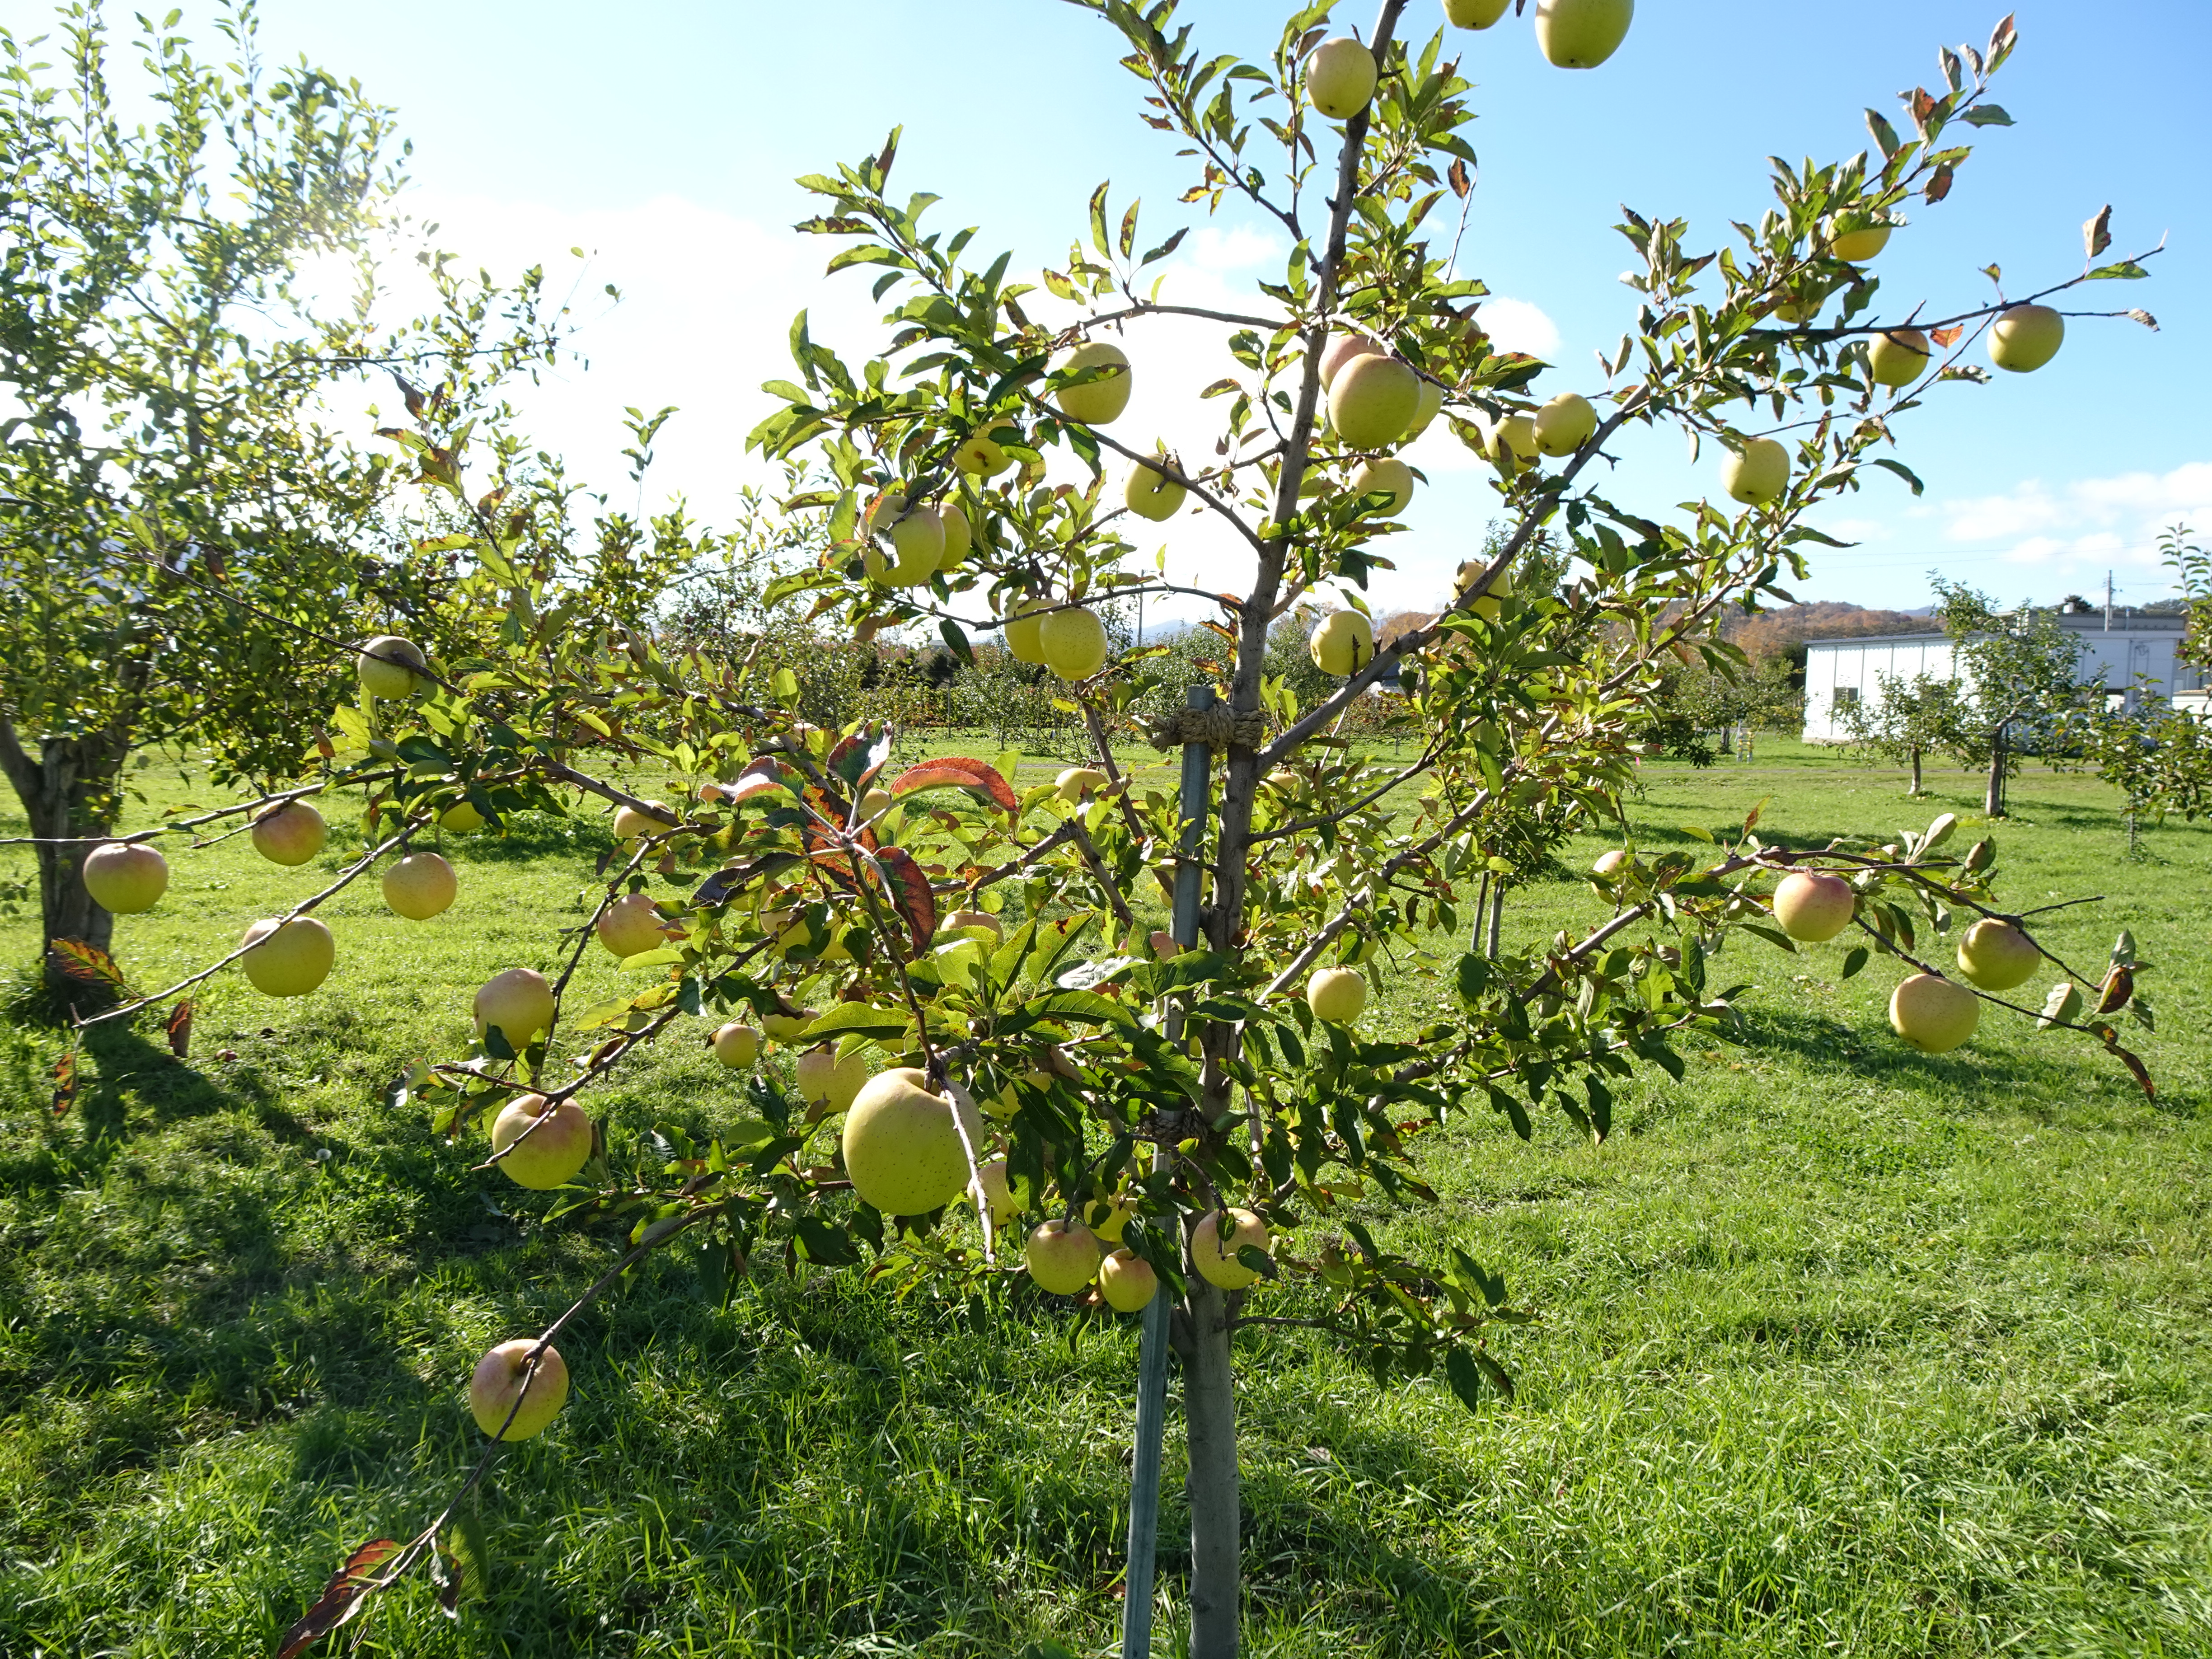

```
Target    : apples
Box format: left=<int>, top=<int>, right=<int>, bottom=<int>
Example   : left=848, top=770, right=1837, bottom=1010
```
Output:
left=1484, top=836, right=1503, bottom=857
left=837, top=972, right=877, bottom=1007
left=1773, top=872, right=1853, bottom=943
left=1117, top=929, right=1178, bottom=993
left=967, top=1151, right=1030, bottom=1227
left=431, top=785, right=487, bottom=833
left=712, top=1023, right=768, bottom=1072
left=1947, top=882, right=1977, bottom=906
left=1003, top=597, right=1066, bottom=663
left=617, top=643, right=643, bottom=667
left=1240, top=927, right=1259, bottom=944
left=1545, top=659, right=1564, bottom=678
left=1310, top=608, right=1375, bottom=676
left=1265, top=770, right=1307, bottom=810
left=1345, top=851, right=1370, bottom=873
left=944, top=407, right=1019, bottom=477
left=842, top=1066, right=984, bottom=1217
left=1441, top=0, right=1516, bottom=32
left=1055, top=342, right=1134, bottom=426
left=696, top=781, right=743, bottom=821
left=1040, top=602, right=1109, bottom=680
left=936, top=909, right=1007, bottom=971
left=1309, top=965, right=1367, bottom=1027
left=912, top=500, right=974, bottom=573
left=1157, top=855, right=1209, bottom=910
left=729, top=772, right=794, bottom=823
left=528, top=555, right=556, bottom=581
left=850, top=787, right=908, bottom=845
left=760, top=894, right=809, bottom=939
left=1024, top=1218, right=1102, bottom=1297
left=303, top=762, right=327, bottom=783
left=796, top=1007, right=823, bottom=1033
left=1533, top=390, right=1599, bottom=458
left=1533, top=0, right=1635, bottom=70
left=1863, top=324, right=1931, bottom=388
left=357, top=636, right=427, bottom=701
left=1456, top=559, right=1513, bottom=622
left=1085, top=1195, right=1149, bottom=1243
left=1351, top=457, right=1415, bottom=518
left=1704, top=1047, right=1725, bottom=1065
left=1101, top=1248, right=1156, bottom=1311
left=471, top=1337, right=570, bottom=1441
left=717, top=854, right=778, bottom=913
left=492, top=1091, right=593, bottom=1192
left=1295, top=840, right=1312, bottom=858
left=1809, top=868, right=1867, bottom=924
left=1050, top=767, right=1114, bottom=826
left=598, top=892, right=670, bottom=960
left=1729, top=1062, right=1746, bottom=1075
left=1327, top=353, right=1422, bottom=448
left=84, top=841, right=170, bottom=916
left=856, top=492, right=946, bottom=588
left=1956, top=915, right=2042, bottom=992
left=1331, top=932, right=1363, bottom=962
left=975, top=1054, right=1051, bottom=1122
left=1822, top=193, right=1893, bottom=260
left=1718, top=436, right=1792, bottom=505
left=763, top=916, right=821, bottom=964
left=491, top=702, right=510, bottom=718
left=251, top=799, right=326, bottom=866
left=1592, top=849, right=1649, bottom=902
left=1121, top=450, right=1190, bottom=522
left=474, top=967, right=555, bottom=1041
left=1305, top=36, right=1379, bottom=122
left=1766, top=259, right=1829, bottom=324
left=1174, top=1029, right=1205, bottom=1059
left=1191, top=1207, right=1269, bottom=1290
left=797, top=1041, right=867, bottom=1112
left=873, top=1010, right=921, bottom=1051
left=786, top=720, right=822, bottom=759
left=714, top=688, right=742, bottom=712
left=1124, top=1051, right=1163, bottom=1088
left=239, top=916, right=336, bottom=999
left=707, top=741, right=730, bottom=765
left=1987, top=303, right=2067, bottom=372
left=738, top=754, right=801, bottom=797
left=1488, top=413, right=1542, bottom=476
left=1888, top=973, right=1981, bottom=1053
left=1319, top=330, right=1401, bottom=400
left=382, top=854, right=459, bottom=922
left=406, top=719, right=424, bottom=735
left=760, top=994, right=808, bottom=1044
left=1091, top=978, right=1141, bottom=1016
left=613, top=798, right=676, bottom=859
left=1527, top=776, right=1552, bottom=800
left=829, top=903, right=869, bottom=959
